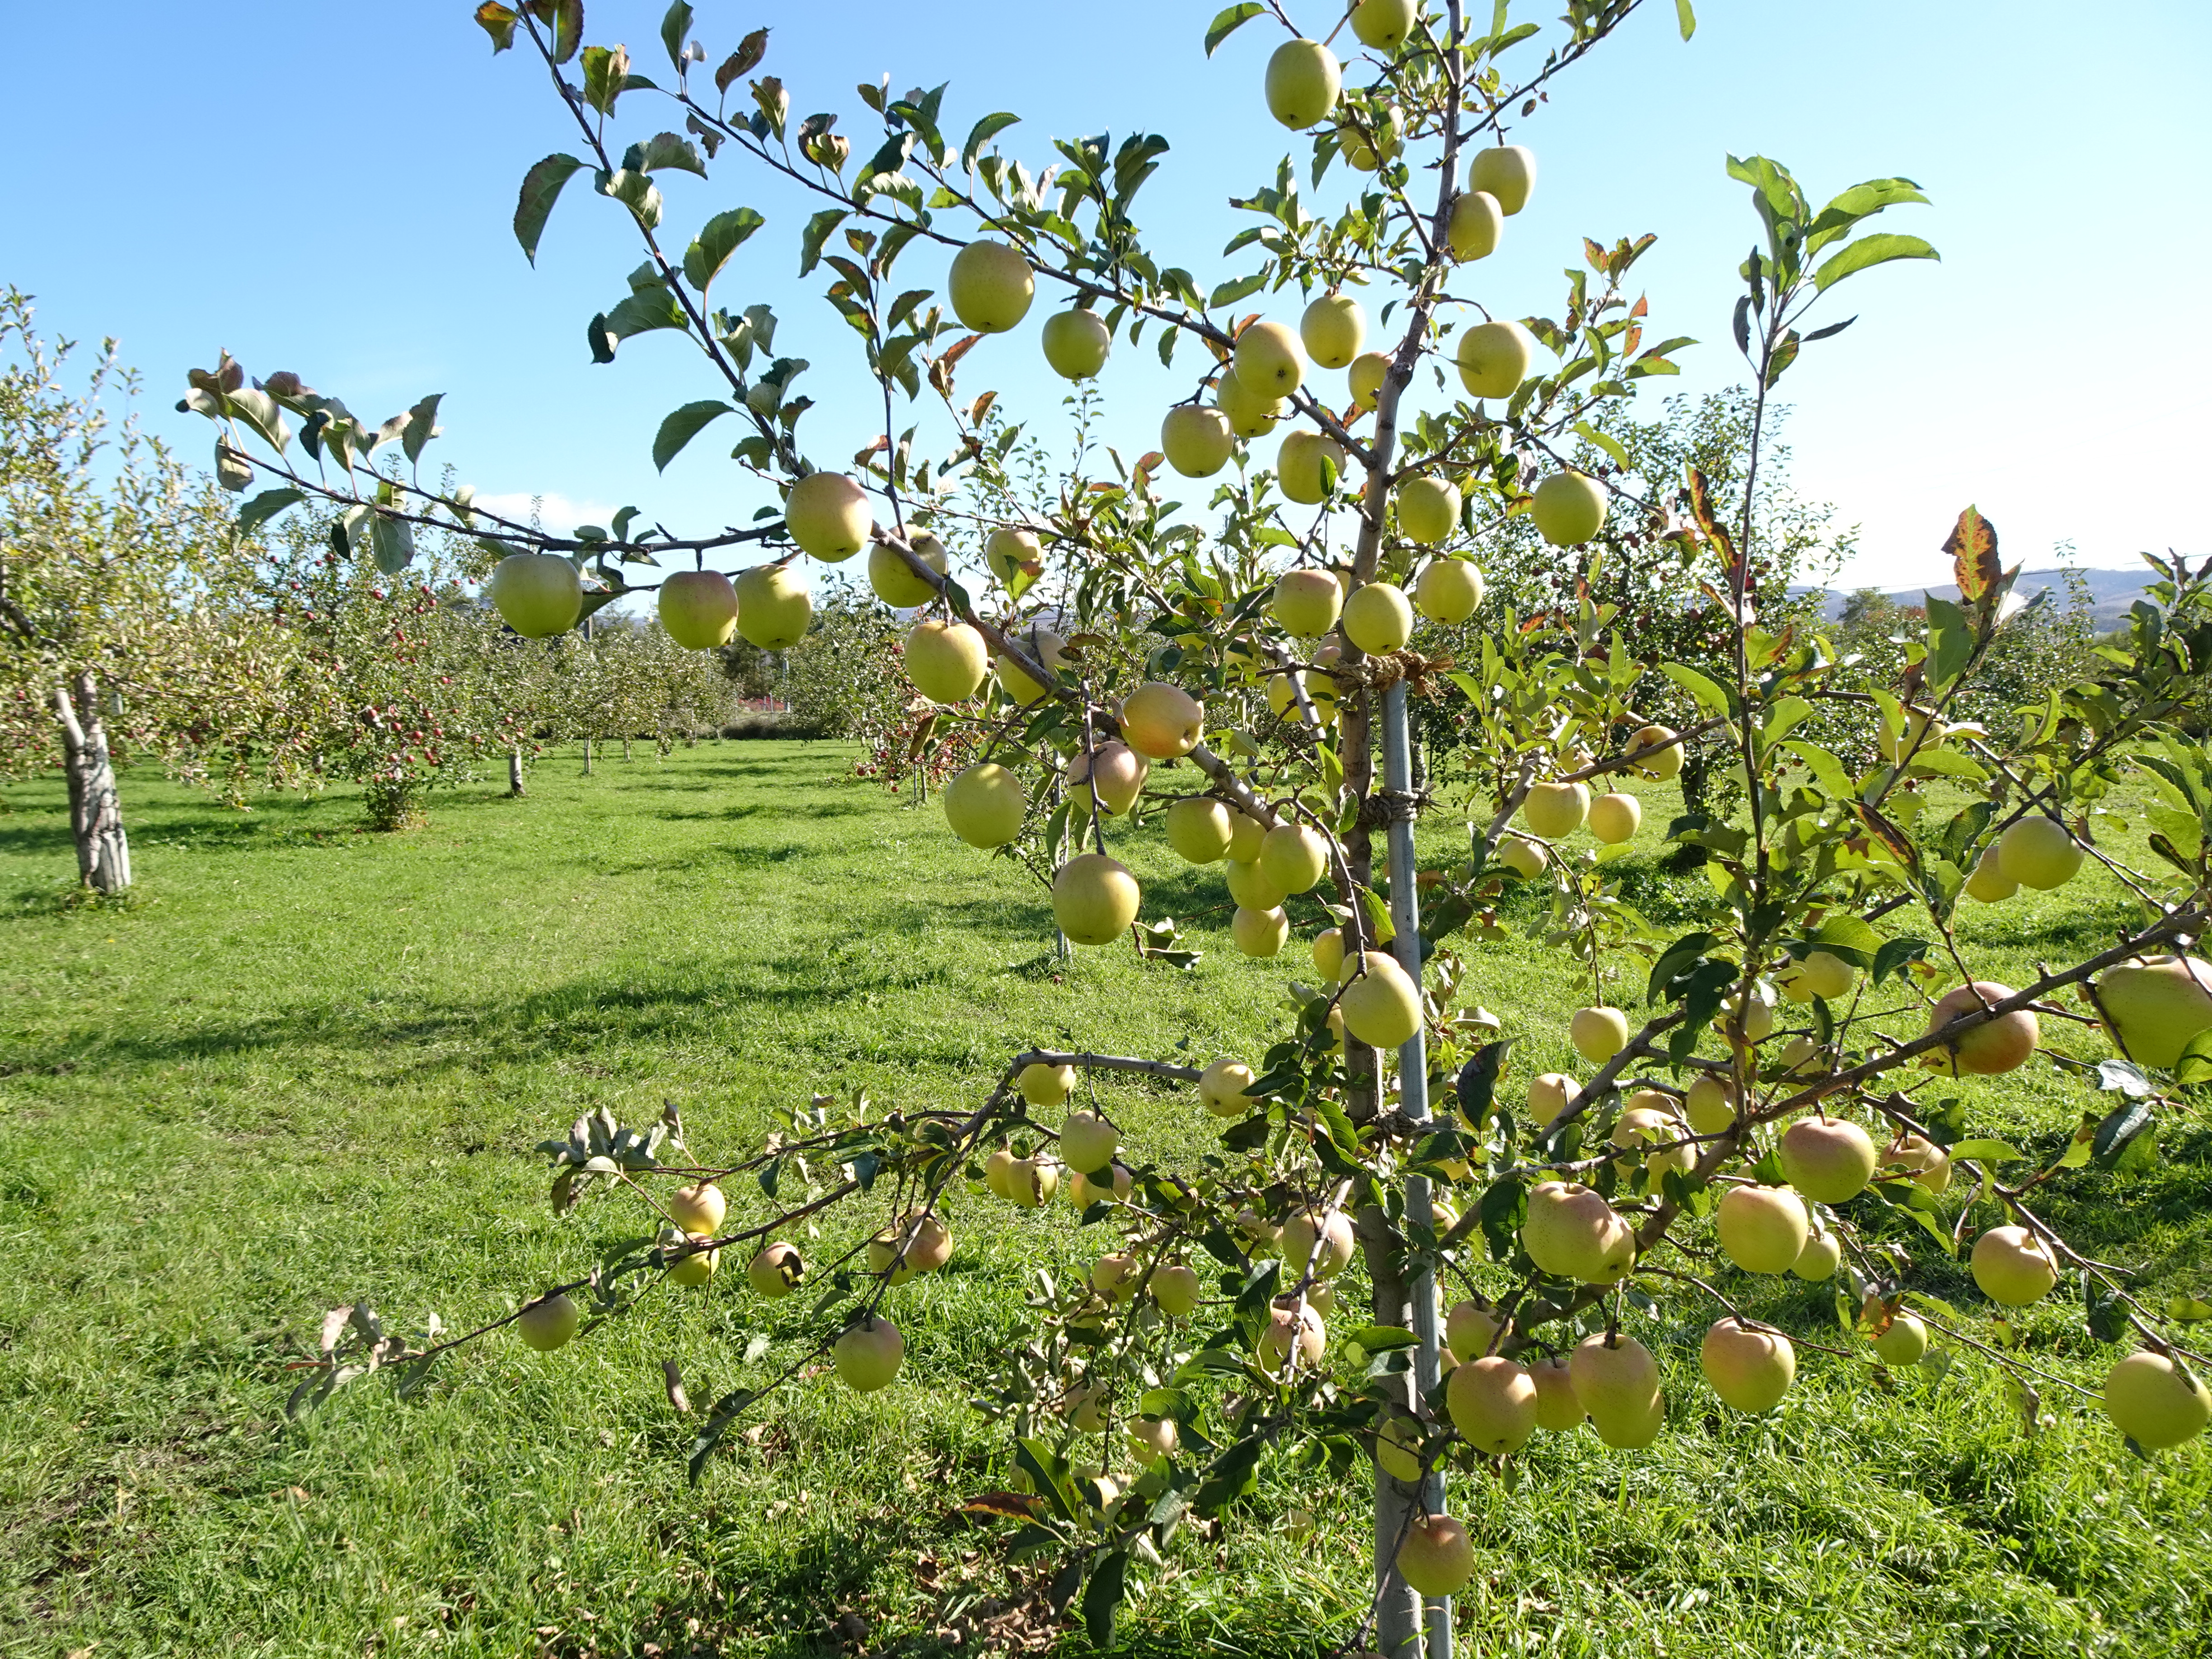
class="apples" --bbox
[1311,700,1339,725]
[1627,1089,1686,1141]
[1582,1212,1644,1288]
[1361,898,1407,953]
[1090,1165,1131,1214]
[1091,1253,1146,1308]
[1149,1264,1200,1315]
[1474,906,1499,930]
[1022,1049,1078,1105]
[785,470,872,563]
[1198,1058,1260,1119]
[1588,1381,1667,1449]
[1278,428,1347,506]
[865,762,878,774]
[1087,1470,1155,1531]
[1530,469,1609,547]
[1526,1357,1593,1432]
[1778,1035,1845,1101]
[1063,1294,1117,1350]
[1430,1349,1461,1383]
[1791,1229,1842,1280]
[1231,898,1290,960]
[1528,1073,1589,1131]
[1456,318,1531,400]
[1070,1166,1116,1223]
[1623,726,1685,783]
[492,552,585,640]
[1878,1133,1954,1204]
[1169,598,1224,655]
[1590,791,1643,844]
[1166,796,1233,864]
[2107,1350,2212,1448]
[1231,320,1308,400]
[1085,663,1100,679]
[1428,99,1445,117]
[1000,629,1074,710]
[1059,1108,1119,1174]
[868,522,950,609]
[1005,1156,1061,1209]
[1212,790,1269,863]
[1570,1330,1658,1417]
[1375,1412,1444,1481]
[986,1145,1048,1200]
[1780,1116,1878,1205]
[947,239,1037,334]
[1160,404,1234,480]
[1226,848,1288,910]
[1701,1315,1798,1412]
[1119,681,1206,761]
[870,1229,919,1286]
[1125,1412,1177,1468]
[1426,1139,1474,1181]
[1775,936,1857,1004]
[1293,1275,1335,1323]
[1417,558,1487,627]
[1274,1489,1314,1540]
[1442,190,1505,263]
[854,765,867,776]
[1341,962,1424,1049]
[1523,780,1592,839]
[1521,1181,1617,1278]
[1709,990,1774,1050]
[1686,1070,1748,1138]
[1302,1074,1347,1127]
[1311,925,1373,982]
[1052,855,1141,945]
[888,785,900,795]
[1397,477,1464,544]
[1430,1022,1460,1053]
[1234,1206,1288,1263]
[1337,951,1401,999]
[1263,38,1344,133]
[1283,1202,1354,1282]
[1301,292,1367,369]
[1732,1160,1803,1214]
[1314,632,1366,668]
[1090,735,1153,787]
[1220,633,1274,689]
[913,1117,978,1173]
[1331,559,1365,596]
[1446,1299,1519,1370]
[1918,1025,1974,1077]
[1501,834,1549,883]
[987,524,1043,585]
[1879,706,1950,770]
[1959,843,2020,905]
[1305,660,1357,709]
[1718,1185,1810,1276]
[656,568,741,652]
[749,1241,805,1297]
[666,1232,721,1285]
[1273,568,1344,640]
[1334,752,1377,792]
[896,1206,954,1270]
[1459,1094,1502,1134]
[834,1315,904,1392]
[1347,0,1418,49]
[880,747,890,759]
[732,565,814,651]
[1446,1356,1541,1456]
[1556,745,1600,781]
[1930,980,2043,1074]
[1538,703,1557,724]
[1333,90,1404,173]
[1267,668,1320,724]
[1041,309,1112,380]
[1250,1299,1326,1382]
[904,618,989,700]
[1970,1225,2060,1306]
[1344,581,1415,657]
[1331,1179,1374,1222]
[1070,742,1142,820]
[1317,1003,1355,1042]
[900,728,912,739]
[517,1291,579,1352]
[1571,1004,1631,1065]
[1349,353,1404,413]
[1218,367,1283,439]
[1611,1108,1700,1198]
[1259,821,1325,895]
[2095,952,2212,1071]
[943,764,1024,848]
[1469,145,1537,217]
[1393,1513,1476,1599]
[1063,1377,1117,1434]
[1999,817,2086,890]
[1414,1202,1460,1252]
[940,749,955,760]
[671,1183,726,1238]
[1873,1307,1929,1366]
